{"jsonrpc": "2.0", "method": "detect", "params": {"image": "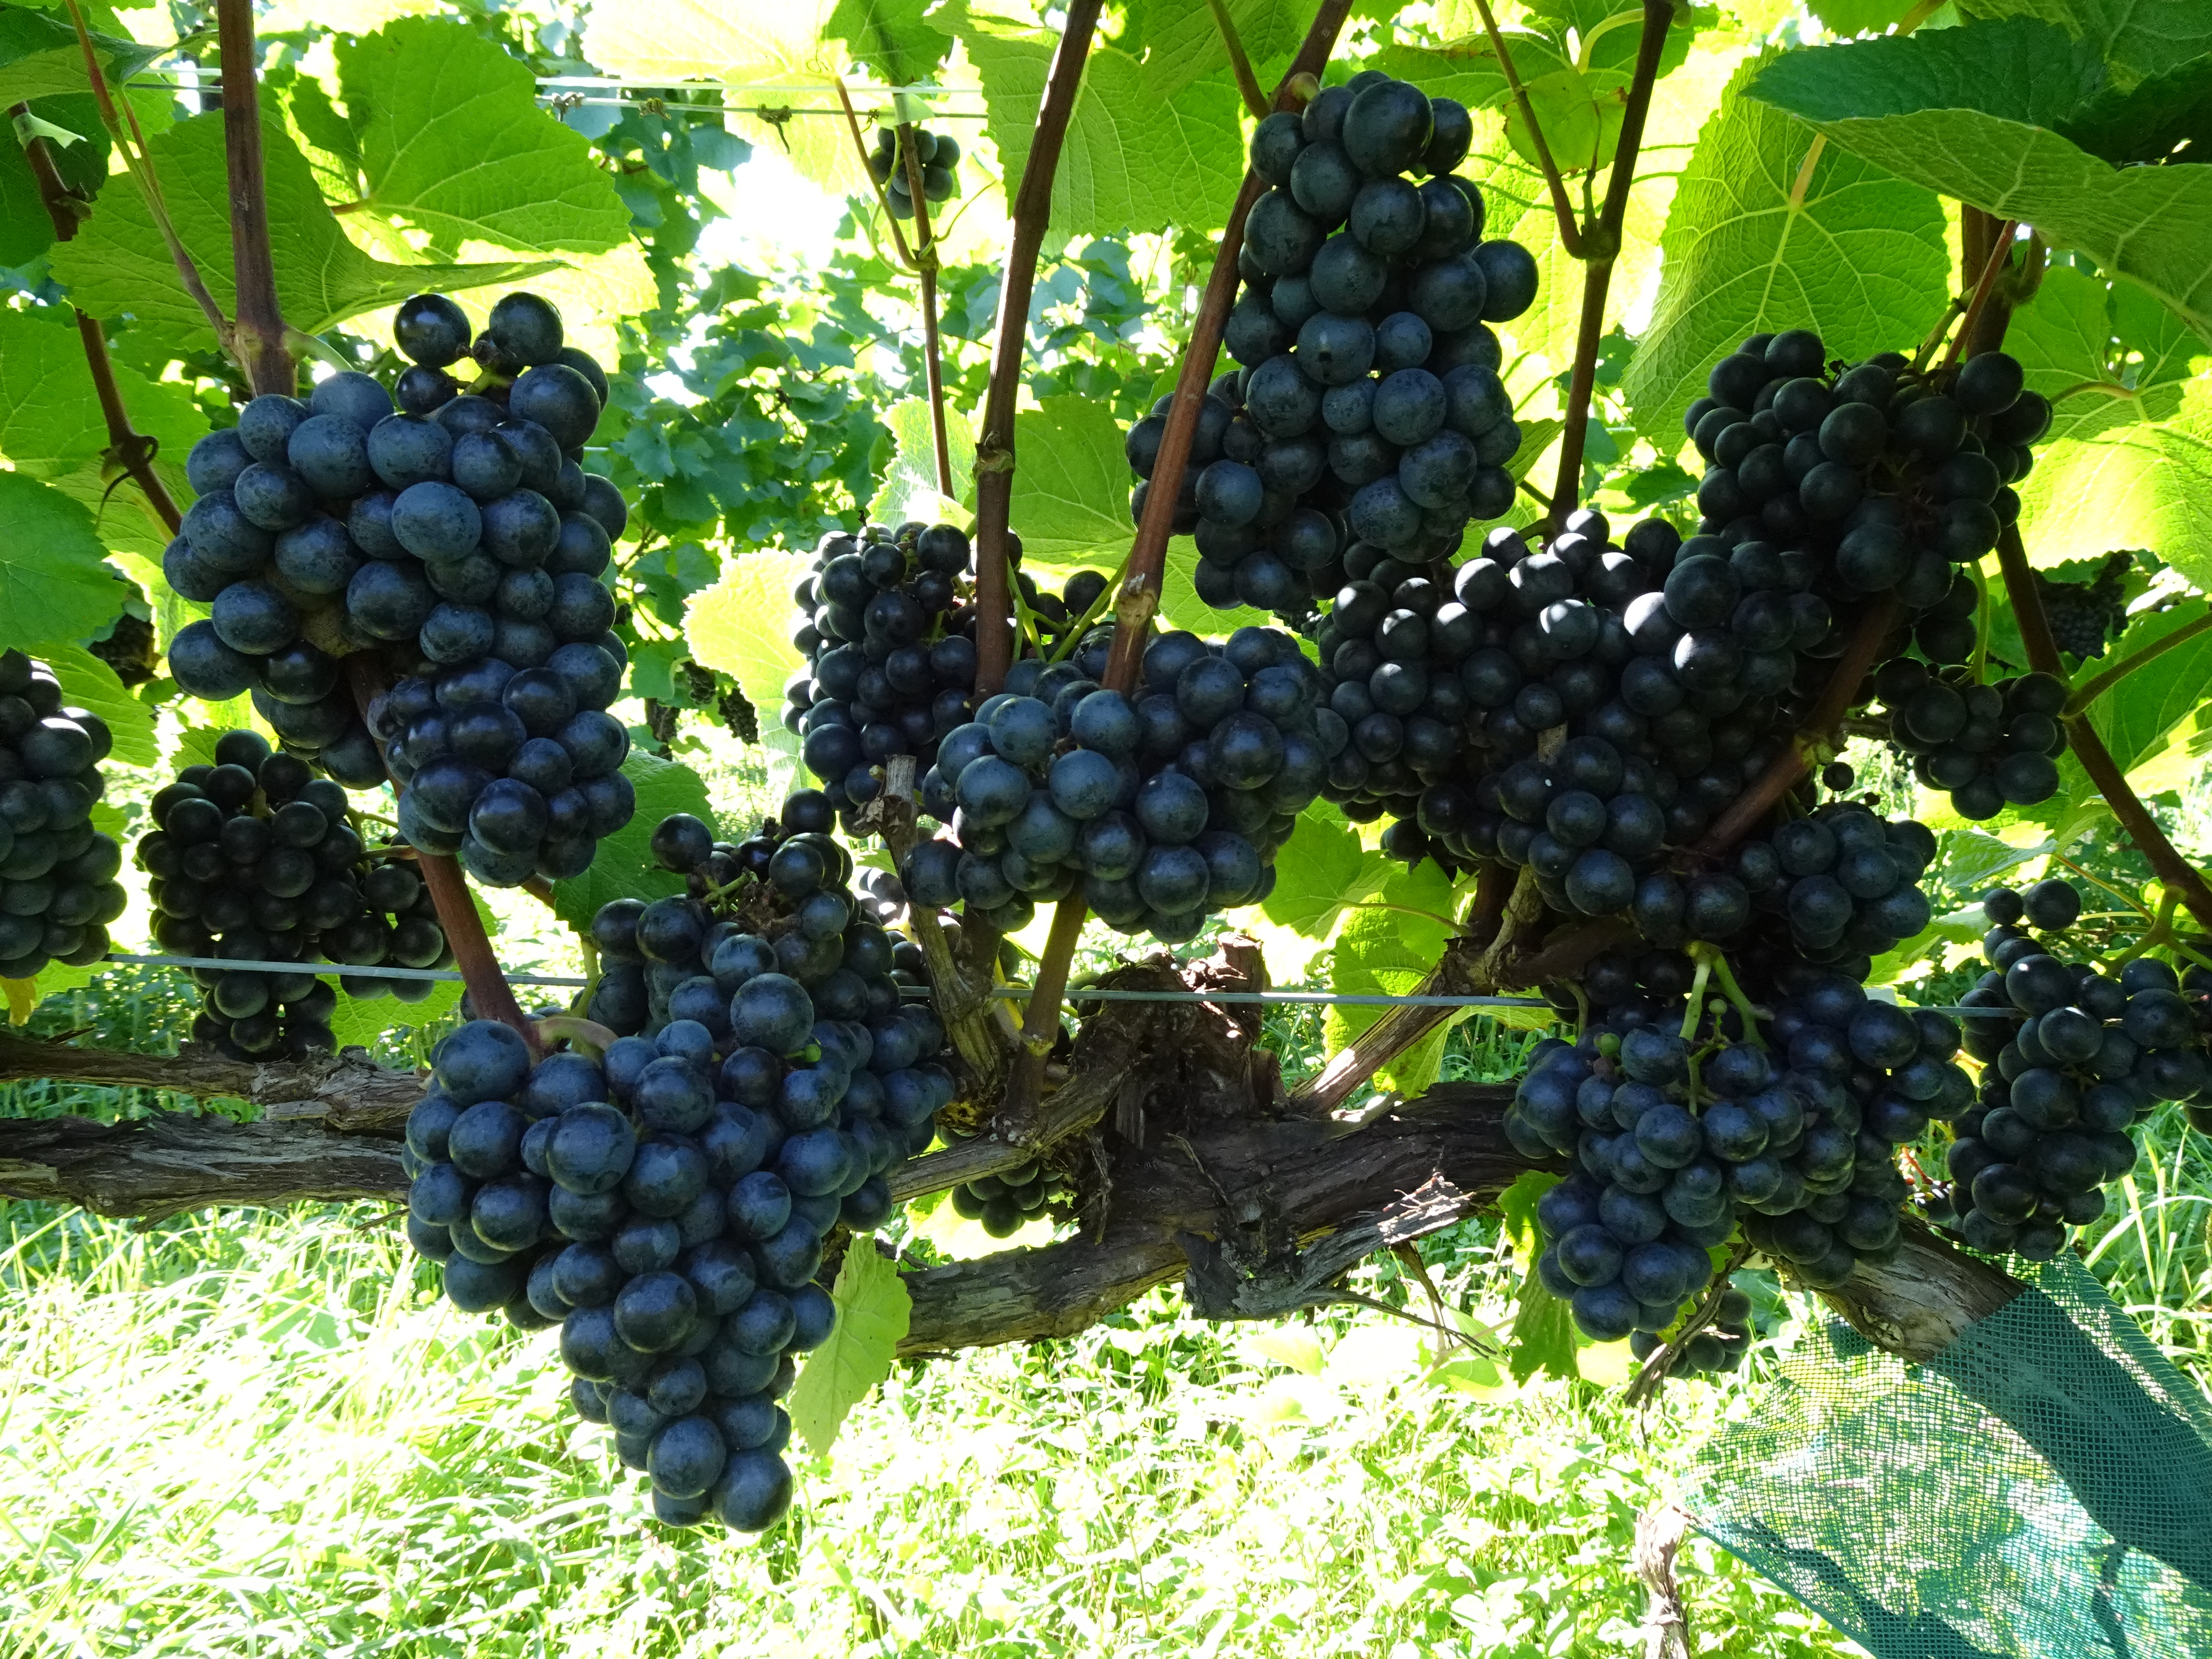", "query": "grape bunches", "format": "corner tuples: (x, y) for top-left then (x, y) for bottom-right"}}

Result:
(1950, 881), (2204, 1261)
(2042, 578), (2106, 663)
(902, 636), (1145, 929)
(1540, 950), (1696, 1025)
(1505, 1004), (1812, 1342)
(0, 646), (126, 979)
(1625, 544), (1828, 717)
(1735, 763), (1936, 985)
(1685, 329), (1877, 706)
(88, 612), (154, 682)
(1076, 627), (1341, 943)
(1630, 1292), (1751, 1378)
(405, 974), (955, 1529)
(717, 689), (760, 746)
(166, 292), (634, 887)
(1128, 389), (1337, 612)
(1741, 977), (1976, 1288)
(1069, 968), (1103, 1011)
(1225, 69), (1539, 563)
(1321, 546), (1486, 821)
(946, 533), (1111, 651)
(870, 125), (960, 220)
(785, 522), (977, 835)
(2171, 943), (2212, 1139)
(1874, 653), (2070, 825)
(1774, 352), (2052, 660)
(888, 918), (1073, 1237)
(1385, 508), (1786, 945)
(140, 728), (364, 1063)
(585, 791), (893, 1037)
(321, 831), (450, 998)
